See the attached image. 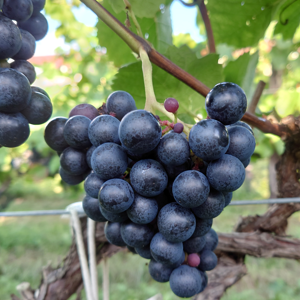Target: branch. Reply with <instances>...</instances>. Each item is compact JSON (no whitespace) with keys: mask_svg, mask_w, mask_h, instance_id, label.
Returning a JSON list of instances; mask_svg holds the SVG:
<instances>
[{"mask_svg":"<svg viewBox=\"0 0 300 300\" xmlns=\"http://www.w3.org/2000/svg\"><path fill=\"white\" fill-rule=\"evenodd\" d=\"M82 3L88 6L99 19H101L114 33H116L136 54L138 59H141L139 49L143 48L147 52L151 63L155 64L178 81H181L184 85L206 99L207 94L211 90L206 84L202 83L189 74L185 69L179 67L177 64L171 62L164 55L159 53L148 40L139 36L128 26L122 24L97 0H82Z\"/></svg>","mask_w":300,"mask_h":300,"instance_id":"30e6481e","label":"branch"},{"mask_svg":"<svg viewBox=\"0 0 300 300\" xmlns=\"http://www.w3.org/2000/svg\"><path fill=\"white\" fill-rule=\"evenodd\" d=\"M242 121L247 122L252 127H255L260 133L273 134L278 136L282 141H286L289 135L296 129L293 124L282 122L271 123L264 117H256L246 111Z\"/></svg>","mask_w":300,"mask_h":300,"instance_id":"325d2c04","label":"branch"}]
</instances>
